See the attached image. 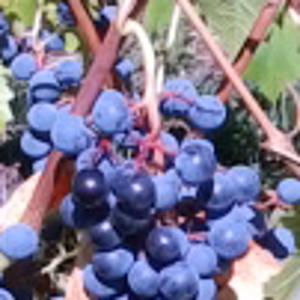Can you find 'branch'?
Instances as JSON below:
<instances>
[{"label":"branch","mask_w":300,"mask_h":300,"mask_svg":"<svg viewBox=\"0 0 300 300\" xmlns=\"http://www.w3.org/2000/svg\"><path fill=\"white\" fill-rule=\"evenodd\" d=\"M143 3L144 0H125L110 22L102 42L84 0H68L76 24L94 61L84 78L77 99L71 104V109L77 117L84 118L88 115L98 87L112 89L116 86L117 79L111 64L124 40L130 19Z\"/></svg>","instance_id":"obj_2"},{"label":"branch","mask_w":300,"mask_h":300,"mask_svg":"<svg viewBox=\"0 0 300 300\" xmlns=\"http://www.w3.org/2000/svg\"><path fill=\"white\" fill-rule=\"evenodd\" d=\"M181 11L186 14L194 28L198 38L213 53L219 65L225 72L221 80L219 95L223 100H228L234 88L246 109L258 120L260 125L268 134L270 146L277 155L289 166L291 171L300 177V151L292 143L293 137L290 134H282L275 126L268 114L254 101L252 94L244 84L241 74L247 71L252 53L258 49V44L269 28L278 9L284 4V0H267L258 20L251 27L248 38L243 42L240 56L232 64L230 58L216 42L207 30L198 9L189 0H176Z\"/></svg>","instance_id":"obj_1"},{"label":"branch","mask_w":300,"mask_h":300,"mask_svg":"<svg viewBox=\"0 0 300 300\" xmlns=\"http://www.w3.org/2000/svg\"><path fill=\"white\" fill-rule=\"evenodd\" d=\"M75 168V158L70 153L53 152L44 159L36 187L20 205V216L35 232L45 227V211L55 207L58 199L72 190L70 175Z\"/></svg>","instance_id":"obj_3"}]
</instances>
